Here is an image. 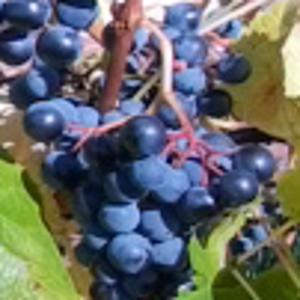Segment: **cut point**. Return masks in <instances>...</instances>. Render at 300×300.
Segmentation results:
<instances>
[{
  "instance_id": "6a23745f",
  "label": "cut point",
  "mask_w": 300,
  "mask_h": 300,
  "mask_svg": "<svg viewBox=\"0 0 300 300\" xmlns=\"http://www.w3.org/2000/svg\"><path fill=\"white\" fill-rule=\"evenodd\" d=\"M138 28L146 30L156 42L161 59V78L159 82V96L163 101L167 97H174L172 86L174 83L175 60L172 42L163 27L152 17L141 15Z\"/></svg>"
}]
</instances>
